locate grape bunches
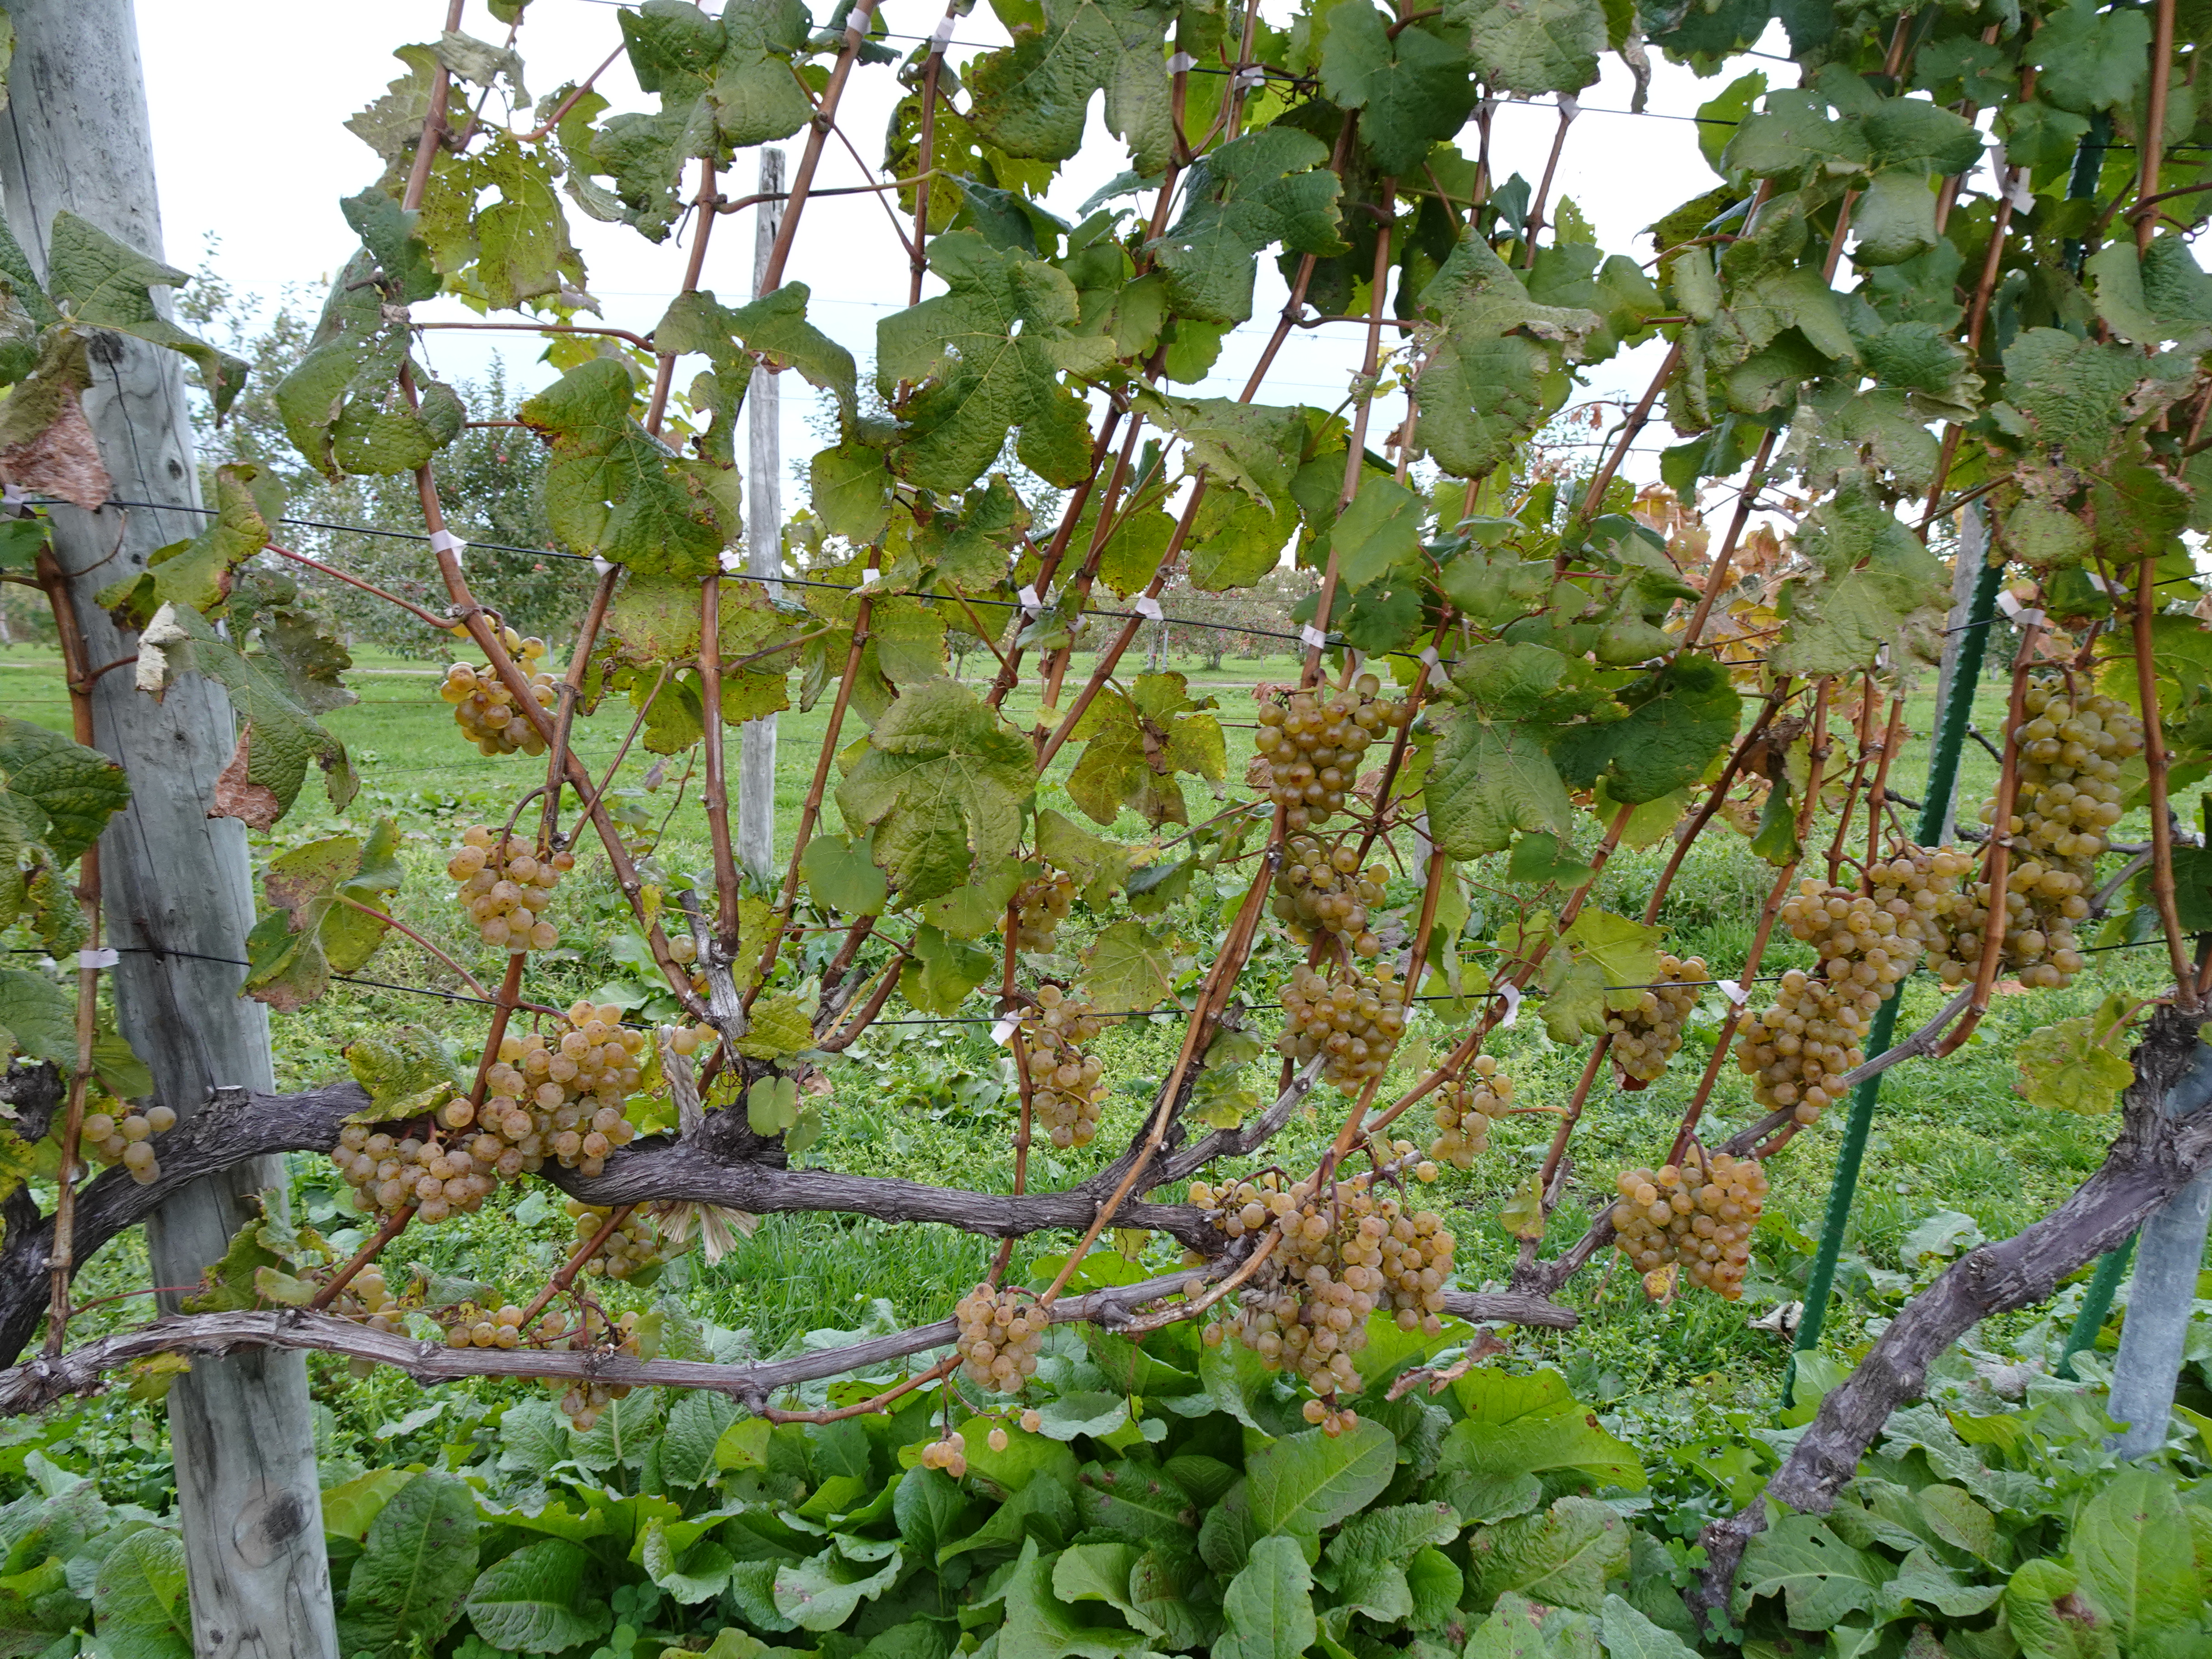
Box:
[954,1281,1048,1394]
[1674,1144,1770,1301]
[1255,674,1406,830]
[544,1290,641,1432]
[666,934,720,1057]
[1277,963,1419,1102]
[1182,1171,1278,1302]
[1271,1182,1383,1438]
[1853,838,1992,986]
[441,615,563,756]
[1184,1287,1310,1371]
[331,1122,497,1225]
[1013,985,1109,1148]
[1429,1047,1515,1171]
[1977,861,2091,988]
[551,999,643,1184]
[1611,1164,1681,1304]
[1734,876,1923,1124]
[444,1300,572,1383]
[1272,836,1390,966]
[562,1196,658,1281]
[1980,671,2148,901]
[448,824,573,955]
[986,1408,1042,1452]
[998,859,1076,959]
[439,1033,553,1183]
[296,1263,411,1378]
[1350,1139,1457,1337]
[1602,950,1711,1081]
[79,1096,178,1186]
[922,1431,968,1477]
